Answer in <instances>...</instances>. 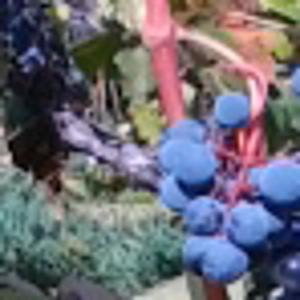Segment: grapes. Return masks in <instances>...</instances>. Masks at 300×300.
Masks as SVG:
<instances>
[{
  "label": "grapes",
  "mask_w": 300,
  "mask_h": 300,
  "mask_svg": "<svg viewBox=\"0 0 300 300\" xmlns=\"http://www.w3.org/2000/svg\"><path fill=\"white\" fill-rule=\"evenodd\" d=\"M207 123L183 119L162 133L159 164L168 172L161 182L163 209L182 213L188 234L195 236L179 250L188 273L211 286H231L253 265L252 251L290 249L273 267L278 287L300 296V161L276 156L248 170L246 182L255 192L228 206L212 194L217 187L218 154L208 139Z\"/></svg>",
  "instance_id": "01657485"
},
{
  "label": "grapes",
  "mask_w": 300,
  "mask_h": 300,
  "mask_svg": "<svg viewBox=\"0 0 300 300\" xmlns=\"http://www.w3.org/2000/svg\"><path fill=\"white\" fill-rule=\"evenodd\" d=\"M214 119L222 128H245L251 122V106L242 93H225L214 101Z\"/></svg>",
  "instance_id": "b958b902"
}]
</instances>
